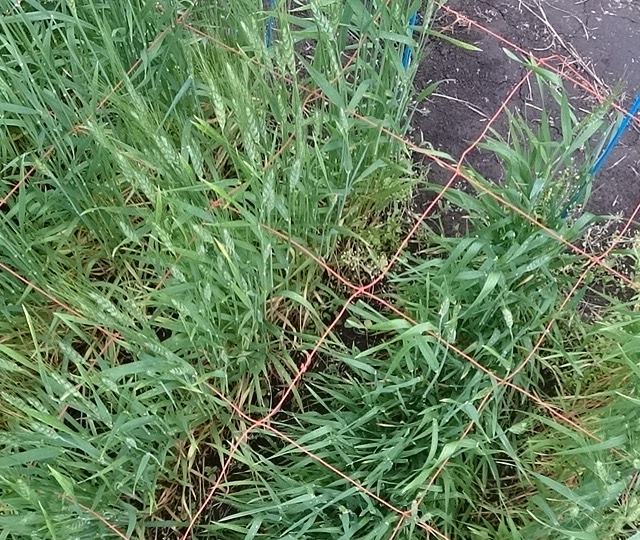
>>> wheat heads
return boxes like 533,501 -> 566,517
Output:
497,309 -> 517,329
171,299 -> 188,315
261,168 -> 274,198
594,460 -> 610,484
437,295 -> 453,314
241,133 -> 259,162
66,520 -> 87,530
208,84 -> 226,131
168,264 -> 185,282
326,40 -> 344,73
223,65 -> 244,88
523,252 -> 551,272
278,26 -> 295,70
274,92 -> 288,123
117,220 -> 141,241
243,106 -> 260,141
118,155 -> 134,184
571,504 -> 581,520
52,372 -> 77,397
310,6 -> 340,39
182,144 -> 201,179
131,86 -> 151,125
183,39 -> 198,78
141,343 -> 168,355
150,130 -> 175,166
193,227 -> 213,240
133,175 -> 154,200
288,160 -> 305,188
149,221 -> 176,248
16,477 -> 33,503
57,338 -> 82,364
32,421 -> 56,441
585,107 -> 608,127
628,504 -> 640,522
90,289 -> 127,322
28,396 -> 47,409
75,299 -> 109,323
122,437 -> 136,448
85,400 -> 103,418
33,161 -> 51,179
586,522 -> 601,532
171,366 -> 189,375
222,230 -> 237,252
102,374 -> 120,394
310,110 -> 322,133
87,120 -> 106,148
243,19 -> 266,60
337,108 -> 352,131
